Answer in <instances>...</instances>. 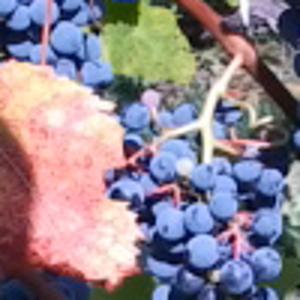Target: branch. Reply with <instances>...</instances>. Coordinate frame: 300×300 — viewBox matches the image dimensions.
Segmentation results:
<instances>
[{
  "label": "branch",
  "instance_id": "30e6481e",
  "mask_svg": "<svg viewBox=\"0 0 300 300\" xmlns=\"http://www.w3.org/2000/svg\"><path fill=\"white\" fill-rule=\"evenodd\" d=\"M180 5L221 43L241 66L260 84L271 98L277 109L287 116L294 125H300V103L289 94L266 64L254 52L251 40L234 29H229L225 22L204 0H180Z\"/></svg>",
  "mask_w": 300,
  "mask_h": 300
}]
</instances>
